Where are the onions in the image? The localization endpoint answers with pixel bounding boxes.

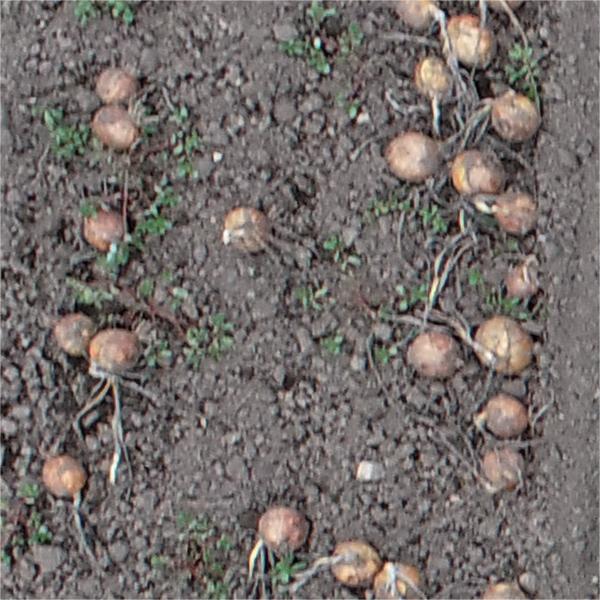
[490,92,539,140]
[478,448,521,489]
[331,537,378,585]
[406,329,459,382]
[483,0,523,12]
[375,562,421,599]
[492,190,534,235]
[49,312,93,357]
[397,0,440,36]
[257,507,305,551]
[482,393,526,438]
[449,18,495,66]
[96,67,139,104]
[89,328,139,375]
[485,577,525,599]
[473,316,532,370]
[40,455,87,497]
[452,150,504,193]
[390,131,443,182]
[221,206,268,252]
[81,208,124,247]
[412,55,453,98]
[91,106,138,151]
[500,260,537,295]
